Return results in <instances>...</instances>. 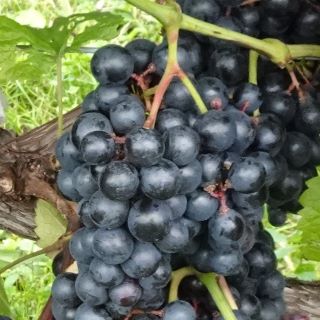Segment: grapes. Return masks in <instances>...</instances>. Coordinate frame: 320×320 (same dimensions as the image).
<instances>
[{"label":"grapes","mask_w":320,"mask_h":320,"mask_svg":"<svg viewBox=\"0 0 320 320\" xmlns=\"http://www.w3.org/2000/svg\"><path fill=\"white\" fill-rule=\"evenodd\" d=\"M183 14L258 39L320 46V0H176Z\"/></svg>","instance_id":"b958b902"},{"label":"grapes","mask_w":320,"mask_h":320,"mask_svg":"<svg viewBox=\"0 0 320 320\" xmlns=\"http://www.w3.org/2000/svg\"><path fill=\"white\" fill-rule=\"evenodd\" d=\"M137 39L99 48L91 74L99 83L84 113L56 144L59 191L79 202L81 228L69 243L78 274L53 261L52 320H124L134 309L164 316L128 320H224L206 284L179 283L168 304L172 272L194 267L226 279L238 320H280L285 277L276 270L263 204L272 226L319 177L320 61L285 68L251 49L179 29L177 63L204 101L199 115L174 76L154 129L142 128L168 61V40Z\"/></svg>","instance_id":"01657485"}]
</instances>
